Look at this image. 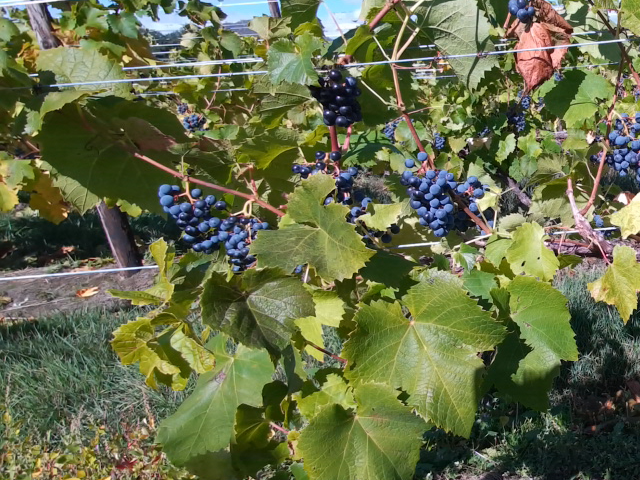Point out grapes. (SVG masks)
Masks as SVG:
<instances>
[{
	"instance_id": "obj_7",
	"label": "grapes",
	"mask_w": 640,
	"mask_h": 480,
	"mask_svg": "<svg viewBox=\"0 0 640 480\" xmlns=\"http://www.w3.org/2000/svg\"><path fill=\"white\" fill-rule=\"evenodd\" d=\"M354 199L358 202H361V207L354 206L351 209V218L349 219V223L353 224L354 221L363 214V208L367 207V203H372V197H365L364 193L361 191H356L354 193Z\"/></svg>"
},
{
	"instance_id": "obj_8",
	"label": "grapes",
	"mask_w": 640,
	"mask_h": 480,
	"mask_svg": "<svg viewBox=\"0 0 640 480\" xmlns=\"http://www.w3.org/2000/svg\"><path fill=\"white\" fill-rule=\"evenodd\" d=\"M325 167H326V164L322 163V162L316 163L314 165V169H312L308 165H294L292 167V172L293 173H300L301 177L303 179H307L309 174L315 175V174L319 173L320 171H324Z\"/></svg>"
},
{
	"instance_id": "obj_9",
	"label": "grapes",
	"mask_w": 640,
	"mask_h": 480,
	"mask_svg": "<svg viewBox=\"0 0 640 480\" xmlns=\"http://www.w3.org/2000/svg\"><path fill=\"white\" fill-rule=\"evenodd\" d=\"M621 118L623 119L625 125L631 129L629 135L631 137H635L640 131V112H637L635 114V123L630 121V116L626 112H623L621 114Z\"/></svg>"
},
{
	"instance_id": "obj_5",
	"label": "grapes",
	"mask_w": 640,
	"mask_h": 480,
	"mask_svg": "<svg viewBox=\"0 0 640 480\" xmlns=\"http://www.w3.org/2000/svg\"><path fill=\"white\" fill-rule=\"evenodd\" d=\"M527 0H510L508 2L509 12L515 16L520 23L528 22L530 17L534 15V7H526Z\"/></svg>"
},
{
	"instance_id": "obj_4",
	"label": "grapes",
	"mask_w": 640,
	"mask_h": 480,
	"mask_svg": "<svg viewBox=\"0 0 640 480\" xmlns=\"http://www.w3.org/2000/svg\"><path fill=\"white\" fill-rule=\"evenodd\" d=\"M614 122L616 124L615 130L611 131V133L607 135V138L610 146H619V149L612 148L611 154H608L606 157V162L614 167L619 177L624 178L628 177L626 170L633 167L636 171V180L640 183V139L633 140L632 148H629L627 145L631 142V138L624 137L621 133L623 126L618 118H615Z\"/></svg>"
},
{
	"instance_id": "obj_1",
	"label": "grapes",
	"mask_w": 640,
	"mask_h": 480,
	"mask_svg": "<svg viewBox=\"0 0 640 480\" xmlns=\"http://www.w3.org/2000/svg\"><path fill=\"white\" fill-rule=\"evenodd\" d=\"M182 193V188L177 184L163 183L158 186L157 198L159 205L162 206L165 214H169L176 221L179 230L184 231L183 241L185 243H193L192 250L196 253L203 251L205 255H212L214 251L220 250L218 243H224L228 257H234L228 260L229 265H233L232 272L247 270L253 266L257 258L250 253V243L246 242L249 237V231L244 227L251 225V240L257 238V231L268 229L267 221L258 222L257 219H241L235 216H228L226 220L219 217H213L210 213L212 206L218 211H226L227 205L225 201H217L213 194H209L203 200H197L193 206L184 201L179 205L174 204V196ZM216 228L217 234L210 236L209 240H203L200 243H194L201 233H208L211 229Z\"/></svg>"
},
{
	"instance_id": "obj_3",
	"label": "grapes",
	"mask_w": 640,
	"mask_h": 480,
	"mask_svg": "<svg viewBox=\"0 0 640 480\" xmlns=\"http://www.w3.org/2000/svg\"><path fill=\"white\" fill-rule=\"evenodd\" d=\"M320 87L311 85L309 90L311 95L323 105V122L326 126H334L348 128L354 122L362 119L361 104L356 100L362 93L357 87V80L348 76L345 84L342 86L338 83H332L327 86L325 78H318Z\"/></svg>"
},
{
	"instance_id": "obj_6",
	"label": "grapes",
	"mask_w": 640,
	"mask_h": 480,
	"mask_svg": "<svg viewBox=\"0 0 640 480\" xmlns=\"http://www.w3.org/2000/svg\"><path fill=\"white\" fill-rule=\"evenodd\" d=\"M359 174V169L356 166H350L346 169V172H340L335 178V188L340 192H349L353 185L352 178Z\"/></svg>"
},
{
	"instance_id": "obj_10",
	"label": "grapes",
	"mask_w": 640,
	"mask_h": 480,
	"mask_svg": "<svg viewBox=\"0 0 640 480\" xmlns=\"http://www.w3.org/2000/svg\"><path fill=\"white\" fill-rule=\"evenodd\" d=\"M371 238H378L380 237V241L382 243H391L392 242V235L391 234H384L383 230H370L367 232V234H363L362 238L366 241H369Z\"/></svg>"
},
{
	"instance_id": "obj_2",
	"label": "grapes",
	"mask_w": 640,
	"mask_h": 480,
	"mask_svg": "<svg viewBox=\"0 0 640 480\" xmlns=\"http://www.w3.org/2000/svg\"><path fill=\"white\" fill-rule=\"evenodd\" d=\"M399 183L406 189V194L410 199V206L416 210L420 217L419 223L424 227H430L435 237H447L450 230L458 229L466 232L469 227L474 228L476 222L464 212L459 211L454 216V204L450 197L442 195L445 193V186L449 187L455 195L466 196V192L472 187L473 196H468L469 209L478 217L482 214L476 204V198H482L484 192H489L491 186L473 176H469L463 184H458L454 180V174L440 169L434 171L427 169L424 177L414 176L412 171H403Z\"/></svg>"
}]
</instances>
